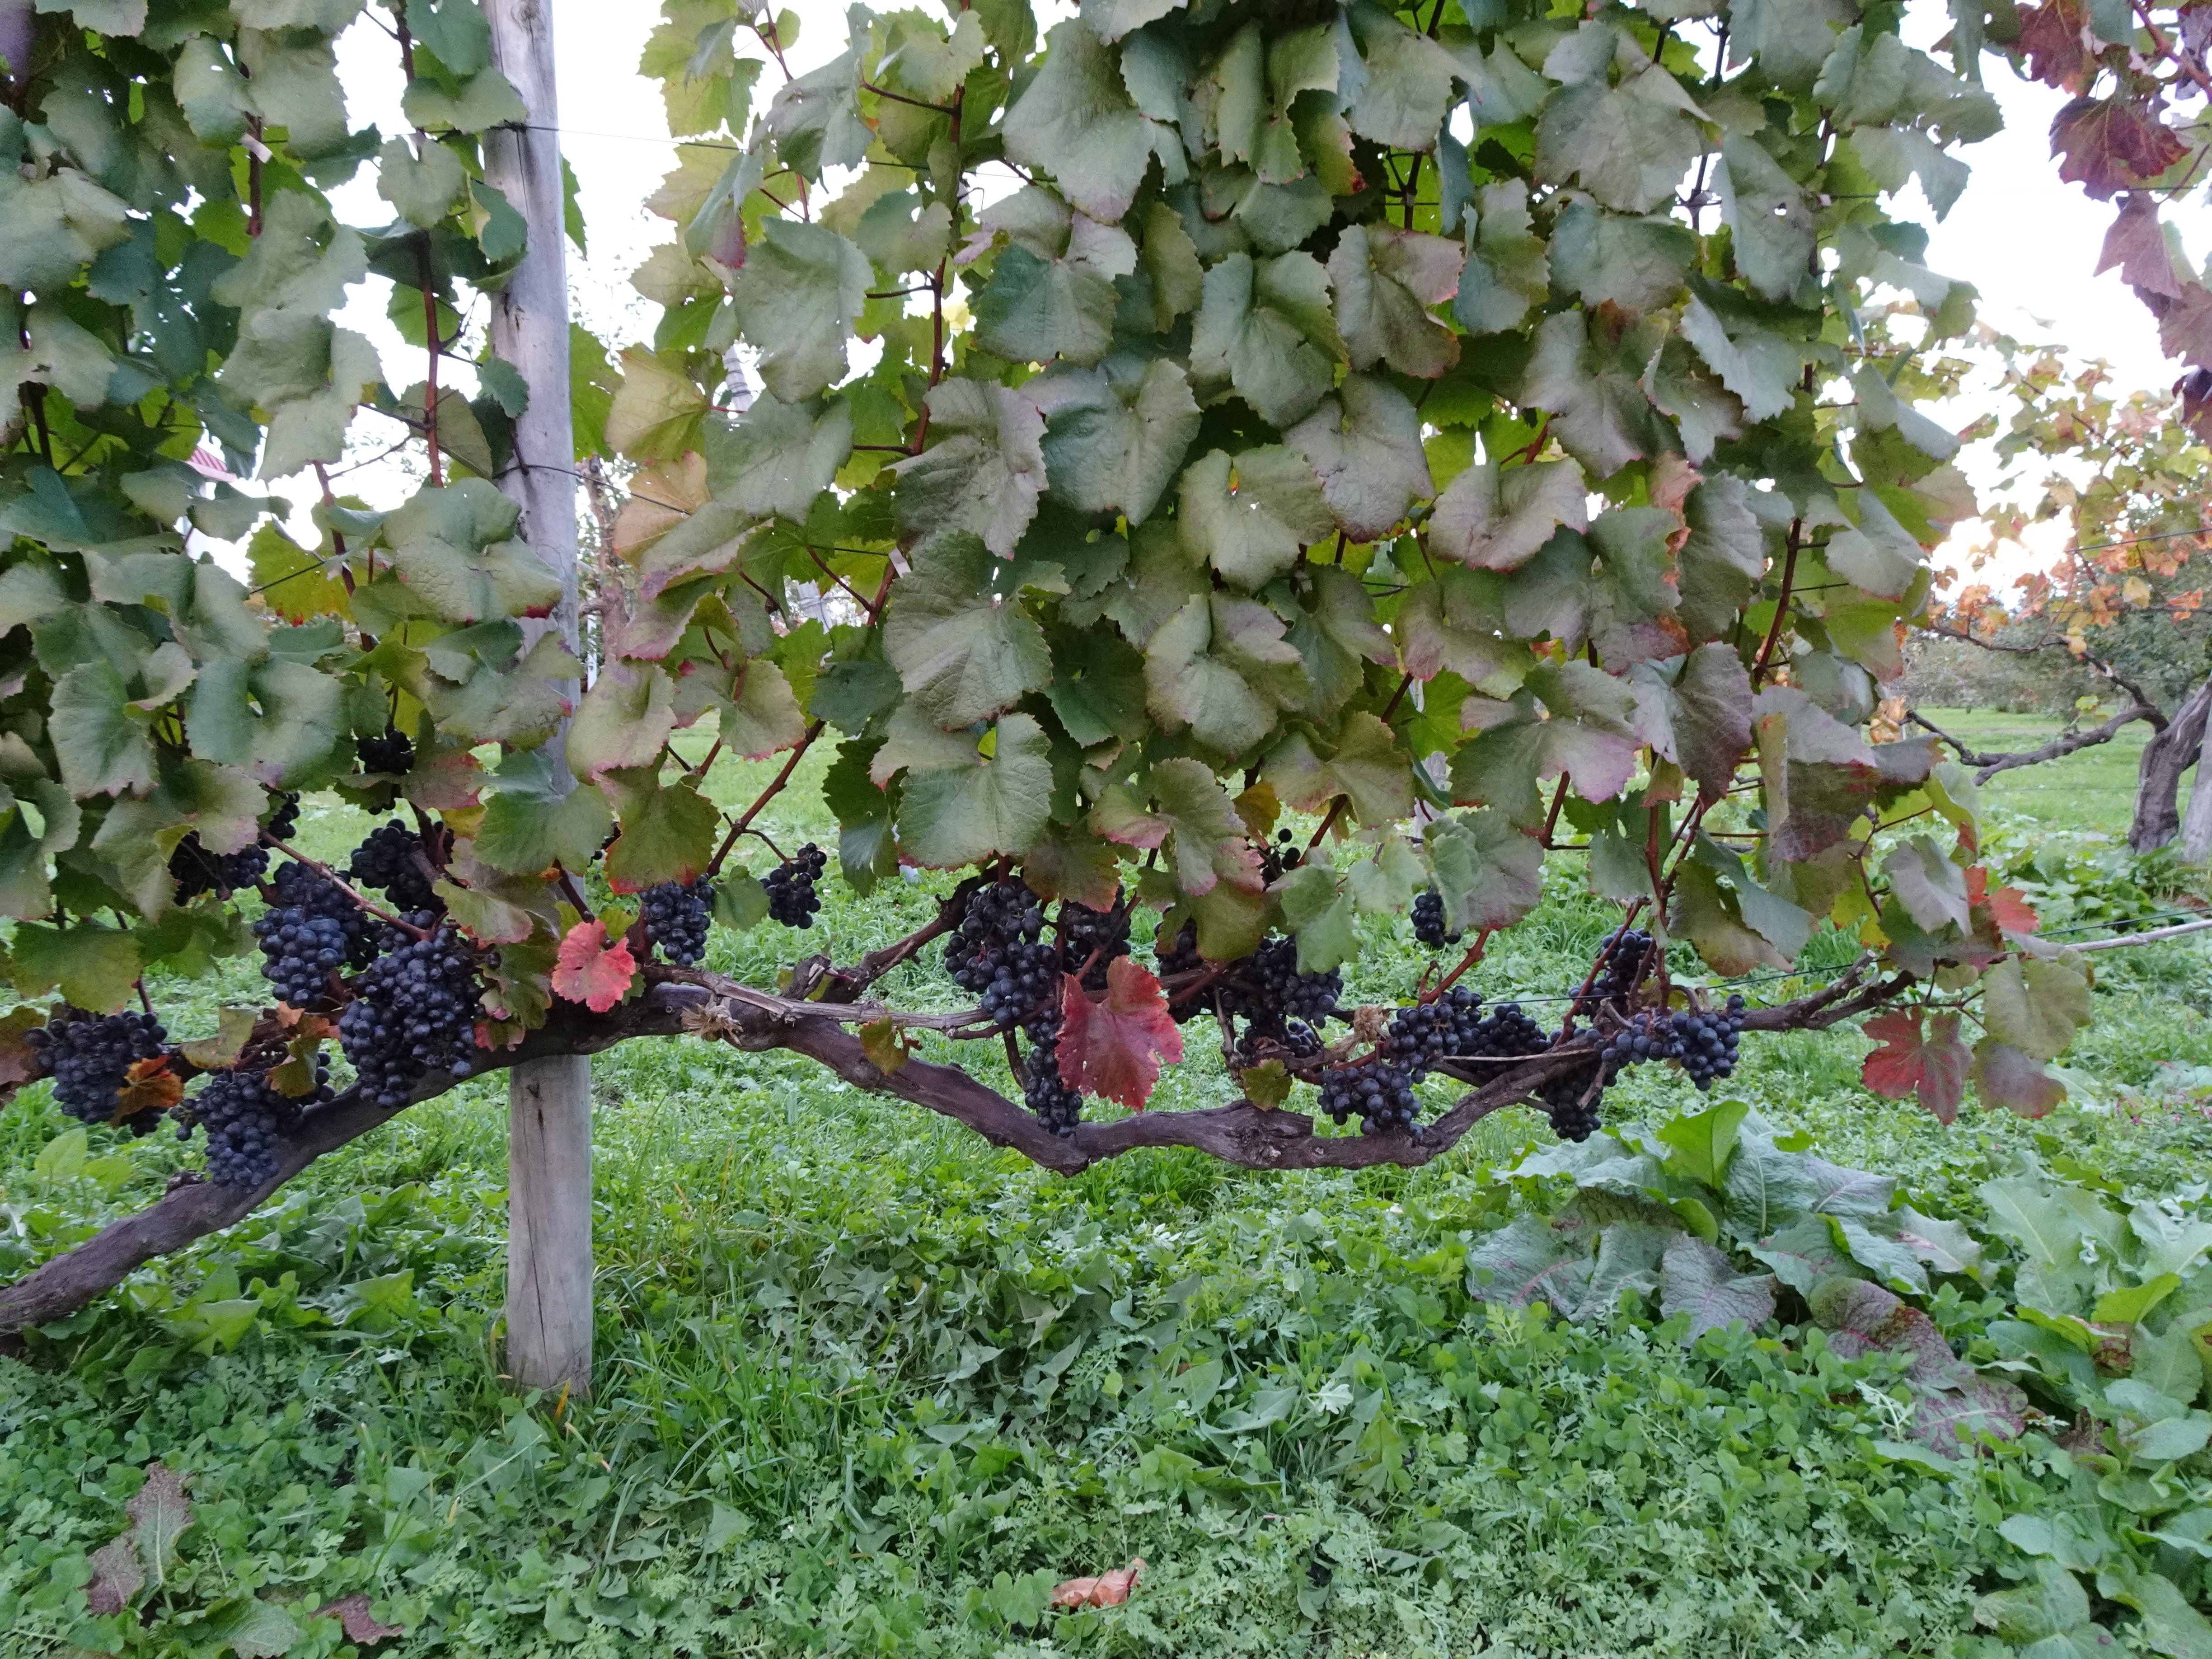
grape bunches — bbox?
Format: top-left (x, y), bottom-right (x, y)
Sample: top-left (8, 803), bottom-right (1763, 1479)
top-left (169, 1063), bottom-right (289, 1190)
top-left (971, 944), bottom-right (1076, 1059)
top-left (338, 912), bottom-right (505, 1105)
top-left (163, 817), bottom-right (271, 899)
top-left (1016, 1035), bottom-right (1099, 1149)
top-left (1315, 1063), bottom-right (1431, 1144)
top-left (1601, 991), bottom-right (1752, 1097)
top-left (342, 819), bottom-right (468, 919)
top-left (637, 853), bottom-right (719, 977)
top-left (1411, 874), bottom-right (1464, 952)
top-left (1228, 919), bottom-right (1348, 1030)
top-left (941, 872), bottom-right (1044, 1007)
top-left (266, 1041), bottom-right (332, 1138)
top-left (1563, 921), bottom-right (1654, 1030)
top-left (1050, 841), bottom-right (1138, 1004)
top-left (1534, 1029), bottom-right (1622, 1142)
top-left (1231, 828), bottom-right (1306, 905)
top-left (1449, 992), bottom-right (1552, 1090)
top-left (28, 1014), bottom-right (166, 1125)
top-left (258, 858), bottom-right (370, 970)
top-left (752, 842), bottom-right (840, 930)
top-left (254, 903), bottom-right (347, 1011)
top-left (1386, 986), bottom-right (1482, 1071)
top-left (355, 721), bottom-right (422, 819)
top-left (1220, 1016), bottom-right (1345, 1079)
top-left (236, 770), bottom-right (302, 851)
top-left (1151, 900), bottom-right (1270, 1021)
top-left (127, 1013), bottom-right (207, 1146)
